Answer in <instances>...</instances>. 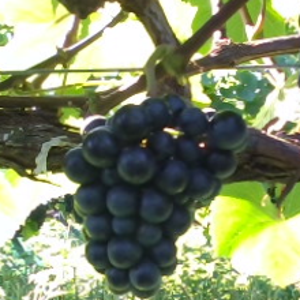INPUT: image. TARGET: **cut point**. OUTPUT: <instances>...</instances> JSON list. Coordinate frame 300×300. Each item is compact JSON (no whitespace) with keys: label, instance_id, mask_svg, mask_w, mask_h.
Returning a JSON list of instances; mask_svg holds the SVG:
<instances>
[{"label":"cut point","instance_id":"6a23745f","mask_svg":"<svg viewBox=\"0 0 300 300\" xmlns=\"http://www.w3.org/2000/svg\"><path fill=\"white\" fill-rule=\"evenodd\" d=\"M163 53L164 49L162 47H157L143 66V73L147 76L146 96L155 97L154 65Z\"/></svg>","mask_w":300,"mask_h":300}]
</instances>
